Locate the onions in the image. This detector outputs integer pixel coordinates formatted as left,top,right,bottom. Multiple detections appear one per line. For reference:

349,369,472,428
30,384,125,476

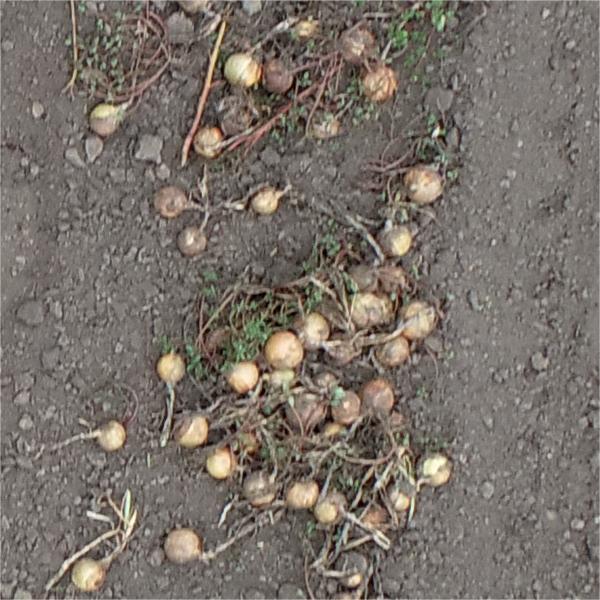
347,263,376,291
267,369,293,392
325,331,359,363
162,526,199,564
398,300,435,340
71,555,106,590
357,503,386,533
205,449,231,477
330,389,362,423
154,185,188,219
242,470,276,505
154,352,185,381
289,17,320,41
338,22,372,62
318,421,347,444
261,59,292,92
262,331,301,369
376,258,406,296
417,453,449,485
295,310,329,345
312,491,344,524
249,184,279,216
222,50,260,87
173,413,209,446
315,371,338,394
386,479,419,517
177,225,206,254
307,113,340,139
231,426,264,459
359,65,395,100
218,93,252,132
403,165,441,203
358,377,396,416
285,479,316,509
89,99,123,135
378,337,409,367
336,546,368,586
191,127,223,159
93,418,125,449
285,389,326,429
224,360,258,393
352,288,392,326
379,224,413,255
